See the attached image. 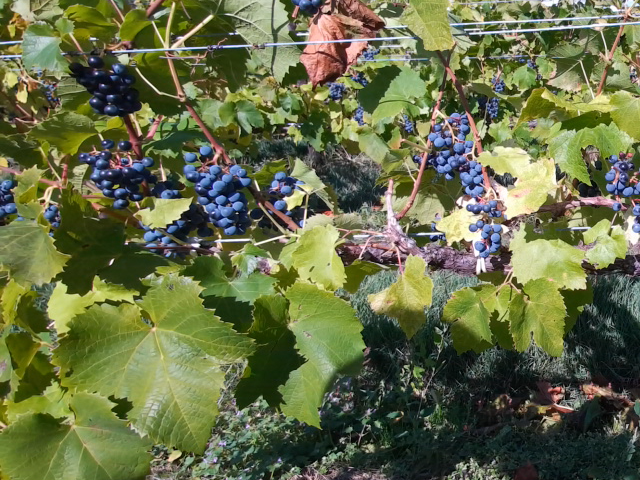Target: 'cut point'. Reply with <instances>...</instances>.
<instances>
[{
    "label": "cut point",
    "instance_id": "6a23745f",
    "mask_svg": "<svg viewBox=\"0 0 640 480\" xmlns=\"http://www.w3.org/2000/svg\"><path fill=\"white\" fill-rule=\"evenodd\" d=\"M494 196V198H498V195L496 194L495 190L493 189V187L491 186L490 188H488V192L486 193V195L484 196V199L489 198V196L491 195Z\"/></svg>",
    "mask_w": 640,
    "mask_h": 480
},
{
    "label": "cut point",
    "instance_id": "7d7e1d6f",
    "mask_svg": "<svg viewBox=\"0 0 640 480\" xmlns=\"http://www.w3.org/2000/svg\"><path fill=\"white\" fill-rule=\"evenodd\" d=\"M438 115L442 118V120H444V123L446 125V127L448 128V131H451V126L448 123L447 118L438 110Z\"/></svg>",
    "mask_w": 640,
    "mask_h": 480
}]
</instances>
